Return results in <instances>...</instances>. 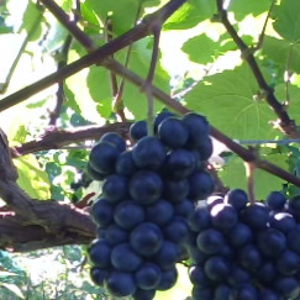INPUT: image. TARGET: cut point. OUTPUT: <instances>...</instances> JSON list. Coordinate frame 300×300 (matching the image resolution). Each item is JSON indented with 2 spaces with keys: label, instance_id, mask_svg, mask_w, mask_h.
<instances>
[{
  "label": "cut point",
  "instance_id": "1",
  "mask_svg": "<svg viewBox=\"0 0 300 300\" xmlns=\"http://www.w3.org/2000/svg\"><path fill=\"white\" fill-rule=\"evenodd\" d=\"M163 28L162 24H157L150 28L149 33H153L151 60L148 73L145 77V92L147 96V135L153 136V97H152V79L156 70L160 31Z\"/></svg>",
  "mask_w": 300,
  "mask_h": 300
},
{
  "label": "cut point",
  "instance_id": "2",
  "mask_svg": "<svg viewBox=\"0 0 300 300\" xmlns=\"http://www.w3.org/2000/svg\"><path fill=\"white\" fill-rule=\"evenodd\" d=\"M245 173L247 176V192H248V198L249 202L255 201V191H254V171L256 165H254L250 161H244L243 162Z\"/></svg>",
  "mask_w": 300,
  "mask_h": 300
}]
</instances>
